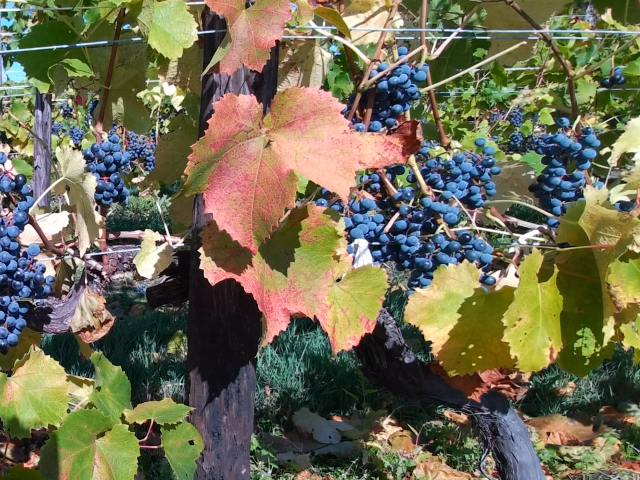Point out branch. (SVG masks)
<instances>
[{
    "instance_id": "30e6481e",
    "label": "branch",
    "mask_w": 640,
    "mask_h": 480,
    "mask_svg": "<svg viewBox=\"0 0 640 480\" xmlns=\"http://www.w3.org/2000/svg\"><path fill=\"white\" fill-rule=\"evenodd\" d=\"M386 36H387V32H382L381 33V36L379 38L376 50H375L373 56L370 58V61H369V64H368V68H367V70H366V72L364 74L362 82L360 80L359 72L356 69L351 49L349 48V46L347 44L343 45V49L346 52V55H347V58H348V62H349V65H350V68H351V71H352V74H353V78L355 79V85L357 87H359V89H358V91L356 93V96H355V98L353 100V104H352L351 110L346 116L347 120H351L352 117L356 113L358 102L360 101V98H361V96H362V94L364 92V89H365L366 85H367L368 79H369V77L371 75V72L373 70V66H374L375 60L378 58L379 54L381 53L382 46H383V43H384V41L386 39Z\"/></svg>"
},
{
    "instance_id": "325d2c04",
    "label": "branch",
    "mask_w": 640,
    "mask_h": 480,
    "mask_svg": "<svg viewBox=\"0 0 640 480\" xmlns=\"http://www.w3.org/2000/svg\"><path fill=\"white\" fill-rule=\"evenodd\" d=\"M119 49V45H112L107 61V70L105 74L104 88L102 94L100 96L97 117H96V133H95V141L100 143L102 141L103 135V120L106 102L111 90V83L113 82L112 76L114 72V63L117 56V52Z\"/></svg>"
},
{
    "instance_id": "170604dd",
    "label": "branch",
    "mask_w": 640,
    "mask_h": 480,
    "mask_svg": "<svg viewBox=\"0 0 640 480\" xmlns=\"http://www.w3.org/2000/svg\"><path fill=\"white\" fill-rule=\"evenodd\" d=\"M541 37L546 39V41L550 44L558 61L564 67V69L568 72V81H569V87L571 91V113H572V118L576 119L577 115H581V114L578 112V106L576 102V88H575L574 79H573V69L570 68V66L563 59L561 52L559 51L555 42L551 40V37L545 33H541Z\"/></svg>"
},
{
    "instance_id": "45aa463d",
    "label": "branch",
    "mask_w": 640,
    "mask_h": 480,
    "mask_svg": "<svg viewBox=\"0 0 640 480\" xmlns=\"http://www.w3.org/2000/svg\"><path fill=\"white\" fill-rule=\"evenodd\" d=\"M406 164L409 165L410 168L412 169V171L414 172L417 185L420 188L421 192L424 194V196L427 197L428 199H431L432 202H436L437 201V196L432 192L431 187L429 186V184L424 182L423 177L420 176V172H419V170L417 168L418 164L416 163L415 156L414 155H410L406 159Z\"/></svg>"
},
{
    "instance_id": "982ccf7c",
    "label": "branch",
    "mask_w": 640,
    "mask_h": 480,
    "mask_svg": "<svg viewBox=\"0 0 640 480\" xmlns=\"http://www.w3.org/2000/svg\"><path fill=\"white\" fill-rule=\"evenodd\" d=\"M429 94H430V104H431V108H432V112H433L435 124H436V133L439 134V142L444 149H448L449 142L445 137L444 128L438 114V109L435 102V92L433 88L429 89Z\"/></svg>"
},
{
    "instance_id": "1ff4a987",
    "label": "branch",
    "mask_w": 640,
    "mask_h": 480,
    "mask_svg": "<svg viewBox=\"0 0 640 480\" xmlns=\"http://www.w3.org/2000/svg\"><path fill=\"white\" fill-rule=\"evenodd\" d=\"M28 224L37 232L38 236L40 237L45 248L48 251H51L56 256H62L64 254V249L60 246L52 244L43 228L33 218H30L28 220Z\"/></svg>"
},
{
    "instance_id": "ea751061",
    "label": "branch",
    "mask_w": 640,
    "mask_h": 480,
    "mask_svg": "<svg viewBox=\"0 0 640 480\" xmlns=\"http://www.w3.org/2000/svg\"><path fill=\"white\" fill-rule=\"evenodd\" d=\"M375 100V89L374 88H370L369 89V93H368V97H367V102H366V109H365V114H364V118H363V123L365 127L369 126V123L371 121V112H372V107H373V103Z\"/></svg>"
},
{
    "instance_id": "ca6c30ca",
    "label": "branch",
    "mask_w": 640,
    "mask_h": 480,
    "mask_svg": "<svg viewBox=\"0 0 640 480\" xmlns=\"http://www.w3.org/2000/svg\"><path fill=\"white\" fill-rule=\"evenodd\" d=\"M506 5L511 6L513 9H515L527 22L530 23L532 28H541V25L536 22L529 14L523 11V9L513 0H506Z\"/></svg>"
},
{
    "instance_id": "1d269e1b",
    "label": "branch",
    "mask_w": 640,
    "mask_h": 480,
    "mask_svg": "<svg viewBox=\"0 0 640 480\" xmlns=\"http://www.w3.org/2000/svg\"><path fill=\"white\" fill-rule=\"evenodd\" d=\"M123 16H124V10L122 8H119L117 10V14H116V18H115V25H114L113 38L115 40L119 39L120 36H121V27H122Z\"/></svg>"
},
{
    "instance_id": "1af6ec82",
    "label": "branch",
    "mask_w": 640,
    "mask_h": 480,
    "mask_svg": "<svg viewBox=\"0 0 640 480\" xmlns=\"http://www.w3.org/2000/svg\"><path fill=\"white\" fill-rule=\"evenodd\" d=\"M489 214H490L491 216H494L495 218H497L499 221H501V222H502L503 224H505L506 226H509V225H510V221H509V220H507V219H505L501 214H499V213L497 212V210L495 209V207H494V206H491V207H490Z\"/></svg>"
},
{
    "instance_id": "2b1400db",
    "label": "branch",
    "mask_w": 640,
    "mask_h": 480,
    "mask_svg": "<svg viewBox=\"0 0 640 480\" xmlns=\"http://www.w3.org/2000/svg\"><path fill=\"white\" fill-rule=\"evenodd\" d=\"M397 8H398V4H397V3H394V4L392 5L391 9H390V13H389L388 18H387V20H386V21H385V23H384V27H389V26H390V23L392 22V20H393V18H394V15H395V12H396V9H397Z\"/></svg>"
},
{
    "instance_id": "8bde2521",
    "label": "branch",
    "mask_w": 640,
    "mask_h": 480,
    "mask_svg": "<svg viewBox=\"0 0 640 480\" xmlns=\"http://www.w3.org/2000/svg\"><path fill=\"white\" fill-rule=\"evenodd\" d=\"M381 183L384 185L385 192H386L388 197H391V196L395 195L394 189L389 185V183L387 182V180L385 178L381 179Z\"/></svg>"
},
{
    "instance_id": "a944a4c4",
    "label": "branch",
    "mask_w": 640,
    "mask_h": 480,
    "mask_svg": "<svg viewBox=\"0 0 640 480\" xmlns=\"http://www.w3.org/2000/svg\"><path fill=\"white\" fill-rule=\"evenodd\" d=\"M435 221H436V223H437L438 225H441V224H444V225H445V227L450 231V234H451V237H450V238H451L452 240H456V239H457V236L454 234V232H453L450 228H448V226L446 225L445 221H444L443 219H441V216H440V215H436V216H435Z\"/></svg>"
}]
</instances>
